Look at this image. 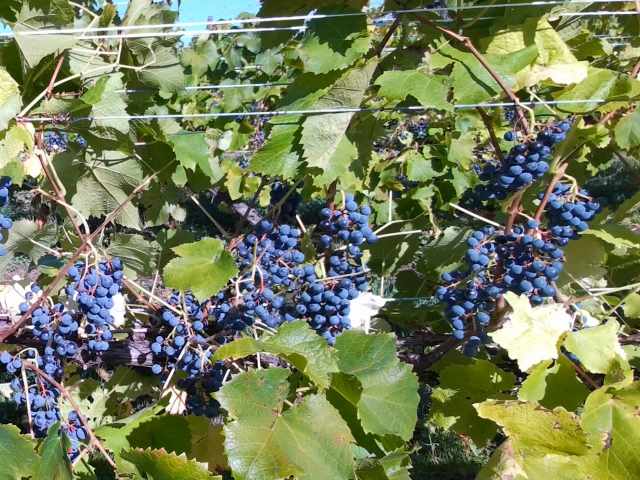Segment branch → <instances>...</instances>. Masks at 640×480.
<instances>
[{
    "label": "branch",
    "mask_w": 640,
    "mask_h": 480,
    "mask_svg": "<svg viewBox=\"0 0 640 480\" xmlns=\"http://www.w3.org/2000/svg\"><path fill=\"white\" fill-rule=\"evenodd\" d=\"M38 162L40 163V165L42 167V170L44 171V174L46 175V178H47L49 184L51 185V187L54 190L55 194L59 198V201H60L61 206L63 208V211L65 213V216L69 220V222L71 223V225H72V227H73V229L75 231V235L77 236V239L83 244L71 256L69 261L66 263V265L63 267V269L60 271L59 275L52 281V283L50 284L48 289L39 296V298L32 305V307L15 323V325L11 329H8L6 332H3L0 335V342H3L6 337H8L9 335L13 334L15 331H17L20 328V326L30 317V315H32L36 311V309L40 306V304L44 301V299L54 290V288L57 286L59 281H61L63 279V277L65 276L67 271L70 269V267L73 265L75 260L78 258V256H80L86 250V248L90 244V242L93 239H95L96 236L99 235L108 226V224L113 220V218L116 217L120 212H122L125 209V207L133 200V198L136 197L138 194H140L150 182H152L154 179H156L159 175L163 174L167 169H169L170 167L174 166L176 164V162H177V158L173 157L171 161L167 162L159 170L155 171L147 179H145L142 182V184L136 190H134L120 204V206L116 210L111 212L110 215L104 220V222L95 231H93L92 234H90L86 239L82 236L76 220L70 214V211H69V208L67 206L66 200H65L62 192L60 191V189L56 185V182L52 178V175H51V173L49 171V168L47 167L42 155L38 156Z\"/></svg>",
    "instance_id": "obj_1"
},
{
    "label": "branch",
    "mask_w": 640,
    "mask_h": 480,
    "mask_svg": "<svg viewBox=\"0 0 640 480\" xmlns=\"http://www.w3.org/2000/svg\"><path fill=\"white\" fill-rule=\"evenodd\" d=\"M413 17L419 20L420 22H423L425 25H428V26H431L432 28L440 30L441 32H444L446 35H448L449 37L453 39H457L462 43H464L468 47V49L473 54L476 55L477 60L481 62V64L483 65V68L486 70L489 76L494 80V82L499 86V88L505 94H507L512 100H515L517 98V94L505 84V82L498 76V74L491 67L490 63L484 57L483 53L464 34L455 32L451 28H448L446 25L442 23H438L437 21H434L433 19H430L425 15L420 14L419 12H415L413 14Z\"/></svg>",
    "instance_id": "obj_2"
},
{
    "label": "branch",
    "mask_w": 640,
    "mask_h": 480,
    "mask_svg": "<svg viewBox=\"0 0 640 480\" xmlns=\"http://www.w3.org/2000/svg\"><path fill=\"white\" fill-rule=\"evenodd\" d=\"M23 365L30 368L31 370L35 371L37 374H39L40 376H42L47 382H49L51 385H53L54 387H56L63 395L64 397L72 404L73 410L74 412L79 416V418L81 419V422L85 428V430L87 431L88 435L90 436L91 440L93 441L94 445L96 446V448L101 452V454L104 456L107 464L112 468V469H116L117 465L112 461V459L110 458L109 454L106 452L105 448L103 446H101V444L99 443L96 435L94 434L93 430L91 429L90 425L87 422L86 416L83 414V412L79 409L76 400L67 392V390L62 387L56 380L52 379L47 373H45L42 369H40L39 367L33 365L31 362L29 361H24Z\"/></svg>",
    "instance_id": "obj_3"
},
{
    "label": "branch",
    "mask_w": 640,
    "mask_h": 480,
    "mask_svg": "<svg viewBox=\"0 0 640 480\" xmlns=\"http://www.w3.org/2000/svg\"><path fill=\"white\" fill-rule=\"evenodd\" d=\"M578 151H579V147L577 145H574L572 147V149L568 152V154L565 156V159L563 160L561 165L551 175L550 180H549L548 185H547V189L545 191V194L543 195V197L541 199V202L539 204V207L537 208V210L535 211V213L533 215V218L535 220H539L541 218V215L544 212V210L546 209V207L548 205V202L550 200V197L553 194L557 179L563 174V172L566 170L568 165L572 162V160L574 159V157H575V155H576V153Z\"/></svg>",
    "instance_id": "obj_4"
},
{
    "label": "branch",
    "mask_w": 640,
    "mask_h": 480,
    "mask_svg": "<svg viewBox=\"0 0 640 480\" xmlns=\"http://www.w3.org/2000/svg\"><path fill=\"white\" fill-rule=\"evenodd\" d=\"M265 182H266V177L262 176L261 180H260V183H259L258 187L256 188V190H255V192H254V194H253V196L251 198V201L249 202L248 206L246 207V209L241 214V216H240V218H239V220H238V222L236 224V227L234 229V232L232 233V236L229 238V243L227 244V250L228 251H231L234 248V240L237 238V235L239 234V231H240V229L242 227V224L244 223V220L246 219L248 213L252 210L254 204L257 201V198H258L259 194L263 190Z\"/></svg>",
    "instance_id": "obj_5"
},
{
    "label": "branch",
    "mask_w": 640,
    "mask_h": 480,
    "mask_svg": "<svg viewBox=\"0 0 640 480\" xmlns=\"http://www.w3.org/2000/svg\"><path fill=\"white\" fill-rule=\"evenodd\" d=\"M404 18L403 14H397L391 21L390 25L387 27L386 31L384 32V34L382 35V37L380 38L378 44L376 45V50L373 52V55L375 57H380L382 55L383 52V48L386 45L388 39L390 38V36L392 35V33L394 32V30L396 29L397 25L399 24V22Z\"/></svg>",
    "instance_id": "obj_6"
},
{
    "label": "branch",
    "mask_w": 640,
    "mask_h": 480,
    "mask_svg": "<svg viewBox=\"0 0 640 480\" xmlns=\"http://www.w3.org/2000/svg\"><path fill=\"white\" fill-rule=\"evenodd\" d=\"M522 197H523V193L521 191H518L514 196V199H513V202H512L508 217H507V221H506V224H505V228H504V231L506 233H510L512 231V227H513V224H514L515 216H516L517 210L519 208V204L521 202Z\"/></svg>",
    "instance_id": "obj_7"
},
{
    "label": "branch",
    "mask_w": 640,
    "mask_h": 480,
    "mask_svg": "<svg viewBox=\"0 0 640 480\" xmlns=\"http://www.w3.org/2000/svg\"><path fill=\"white\" fill-rule=\"evenodd\" d=\"M67 54H68V51H67V50H64V51L62 52V54L60 55V58H59L58 64H57V66L55 67L54 71L52 72V74H51V76H50L49 83H48V87H47V89H46V91H45V100H46V101H49V100H50V94H51V92H52V90H53L54 81H55V79H56V76H57V75H58V73L60 72V70H61V68H62L63 64H64V61H65V58H66Z\"/></svg>",
    "instance_id": "obj_8"
},
{
    "label": "branch",
    "mask_w": 640,
    "mask_h": 480,
    "mask_svg": "<svg viewBox=\"0 0 640 480\" xmlns=\"http://www.w3.org/2000/svg\"><path fill=\"white\" fill-rule=\"evenodd\" d=\"M121 283L123 284V286L125 287V289L132 294L138 301H140L141 303L145 304L146 306H148L152 311L156 310V306L150 302L149 300H147L146 298L142 297L135 289H133L130 284L127 282L126 279H122Z\"/></svg>",
    "instance_id": "obj_9"
},
{
    "label": "branch",
    "mask_w": 640,
    "mask_h": 480,
    "mask_svg": "<svg viewBox=\"0 0 640 480\" xmlns=\"http://www.w3.org/2000/svg\"><path fill=\"white\" fill-rule=\"evenodd\" d=\"M515 113H516L518 122L523 128H525V133L527 135H530L532 133V125L526 121L523 110L520 107H517L515 109Z\"/></svg>",
    "instance_id": "obj_10"
}]
</instances>
